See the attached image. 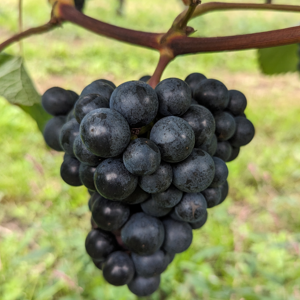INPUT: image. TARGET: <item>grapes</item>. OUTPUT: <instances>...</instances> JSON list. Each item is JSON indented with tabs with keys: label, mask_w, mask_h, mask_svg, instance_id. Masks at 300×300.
Masks as SVG:
<instances>
[{
	"label": "grapes",
	"mask_w": 300,
	"mask_h": 300,
	"mask_svg": "<svg viewBox=\"0 0 300 300\" xmlns=\"http://www.w3.org/2000/svg\"><path fill=\"white\" fill-rule=\"evenodd\" d=\"M150 79H96L81 94L53 86L41 97L55 116L43 137L65 152L63 181L91 195L86 251L109 285L139 297L158 289L207 209L227 198L226 163L255 135L242 92L200 72L154 89Z\"/></svg>",
	"instance_id": "grapes-1"
}]
</instances>
